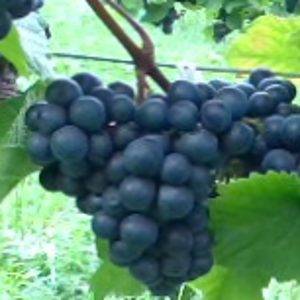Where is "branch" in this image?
Returning a JSON list of instances; mask_svg holds the SVG:
<instances>
[{
    "label": "branch",
    "instance_id": "1",
    "mask_svg": "<svg viewBox=\"0 0 300 300\" xmlns=\"http://www.w3.org/2000/svg\"><path fill=\"white\" fill-rule=\"evenodd\" d=\"M89 7L96 13V16L110 30L116 43L120 45L133 59L136 66L137 76V99L142 101L148 94L146 75L150 76L165 93L171 90V82L163 72L152 62L156 56V47L152 40L148 38L146 31L132 19L122 7L114 0H103L116 13L139 34L143 42V47L137 48L132 39L119 26L116 20L109 13L108 8L99 0H85Z\"/></svg>",
    "mask_w": 300,
    "mask_h": 300
}]
</instances>
